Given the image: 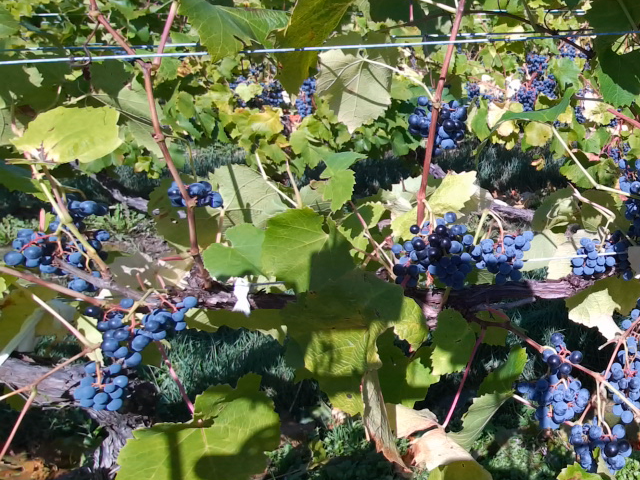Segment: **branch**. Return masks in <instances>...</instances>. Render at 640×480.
<instances>
[{"label": "branch", "mask_w": 640, "mask_h": 480, "mask_svg": "<svg viewBox=\"0 0 640 480\" xmlns=\"http://www.w3.org/2000/svg\"><path fill=\"white\" fill-rule=\"evenodd\" d=\"M136 62L146 69L145 79H146V90H147L149 111L151 114L152 124L154 127V135L157 139L161 156L163 157L168 169L175 177V180L177 181V184L179 185V188L184 196V200L189 204L188 216H189V230H190V246L192 249V254L194 256L196 266L200 269V273L203 276V280H211L210 274L202 261L201 254L199 252V246L197 243V227H196V213H195V207H196L197 201L191 197V194L187 188V185L181 173L175 167V164L173 163L168 153L165 139L161 132V125H160L159 115L156 108L155 94H154V88H153L152 73H153L154 64L152 62H147L143 58L136 59Z\"/></svg>", "instance_id": "branch-1"}, {"label": "branch", "mask_w": 640, "mask_h": 480, "mask_svg": "<svg viewBox=\"0 0 640 480\" xmlns=\"http://www.w3.org/2000/svg\"><path fill=\"white\" fill-rule=\"evenodd\" d=\"M454 52H455V45H448V49L442 61L441 72L439 73L438 82L434 92V98H433V104H432V116L430 119V125L428 127L427 143L423 153V162L421 165L420 193L418 196V201L416 203L417 222L419 224H422L424 222V209H423L424 204L422 203V199L426 198L427 196L428 168L430 165V156L434 146L435 130H436L437 122L439 118V106H440L441 94L444 88L446 76L448 74L449 63L453 57Z\"/></svg>", "instance_id": "branch-2"}, {"label": "branch", "mask_w": 640, "mask_h": 480, "mask_svg": "<svg viewBox=\"0 0 640 480\" xmlns=\"http://www.w3.org/2000/svg\"><path fill=\"white\" fill-rule=\"evenodd\" d=\"M469 318L471 320H473L476 323H480V324H484L486 326H495V327H500V328H506L511 330L514 334H516L518 337H521L522 340L529 345L531 348H534L536 350L542 351V352H547V353H553L556 355V357L564 364L569 365L570 367L578 370L580 373H584L587 376H589L590 378L595 379L596 377L600 378V382H603L605 380V376L602 373L593 371L592 369H590L587 366H583L581 363L576 362L575 360H572L571 358H568L567 356H565L562 351L555 346H550V345H544L541 343H538L534 340H532L525 331L521 330L520 328H518L515 324H513L512 322L509 321H502V320H498V319H488L486 317L483 316H479L477 314H475L474 312H471L469 314Z\"/></svg>", "instance_id": "branch-3"}, {"label": "branch", "mask_w": 640, "mask_h": 480, "mask_svg": "<svg viewBox=\"0 0 640 480\" xmlns=\"http://www.w3.org/2000/svg\"><path fill=\"white\" fill-rule=\"evenodd\" d=\"M31 171L32 174L34 175V177L36 178L40 189L42 190L43 194L45 195L47 201L49 202V204L51 205V207L53 208L55 214L57 215V217L63 221L66 226L68 227V229L76 236L77 240L79 241V243L82 245V247L87 251L88 256L94 260L97 263V267L100 271V274L102 277L108 278L110 280H112V273L109 269V266L107 264V262L104 259H101V257L95 253L93 247L87 242V240L85 239L84 235L82 234V232L75 226V224L72 222V220L63 213L62 209L60 208V205L57 203V201L55 200L53 194L51 193L49 187L47 186L41 172L39 171V168L36 164H33L31 166Z\"/></svg>", "instance_id": "branch-4"}, {"label": "branch", "mask_w": 640, "mask_h": 480, "mask_svg": "<svg viewBox=\"0 0 640 480\" xmlns=\"http://www.w3.org/2000/svg\"><path fill=\"white\" fill-rule=\"evenodd\" d=\"M91 5L93 15L97 20L112 34L117 42L123 47L128 54H136V51L129 45V43L123 38L121 32L109 23V21L100 12L98 3L95 0H88Z\"/></svg>", "instance_id": "branch-5"}, {"label": "branch", "mask_w": 640, "mask_h": 480, "mask_svg": "<svg viewBox=\"0 0 640 480\" xmlns=\"http://www.w3.org/2000/svg\"><path fill=\"white\" fill-rule=\"evenodd\" d=\"M466 4L465 0H459L458 4H457V15L455 18V21L452 25V31L450 34V39L451 40H456L457 36L459 34V27L461 26V23L465 17V9L464 6Z\"/></svg>", "instance_id": "branch-6"}]
</instances>
